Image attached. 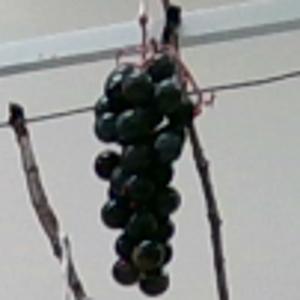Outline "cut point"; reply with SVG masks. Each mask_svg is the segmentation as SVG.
Returning a JSON list of instances; mask_svg holds the SVG:
<instances>
[{
  "label": "cut point",
  "instance_id": "1",
  "mask_svg": "<svg viewBox=\"0 0 300 300\" xmlns=\"http://www.w3.org/2000/svg\"><path fill=\"white\" fill-rule=\"evenodd\" d=\"M149 5L150 0H139V12L134 17L136 24L141 29V65L148 62V27L153 21Z\"/></svg>",
  "mask_w": 300,
  "mask_h": 300
}]
</instances>
